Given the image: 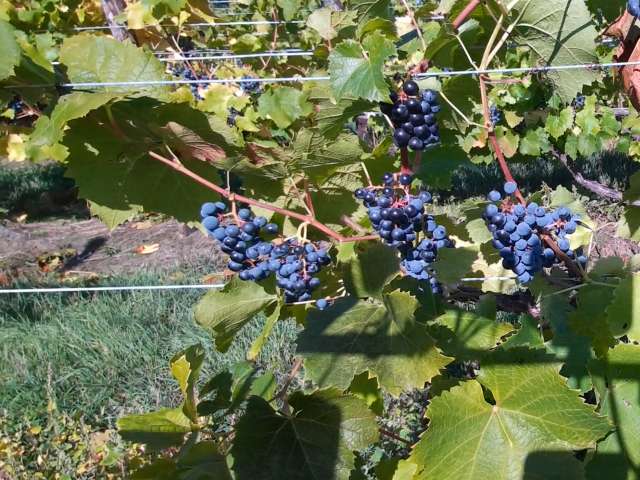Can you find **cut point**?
Masks as SVG:
<instances>
[{
    "label": "cut point",
    "instance_id": "6a23745f",
    "mask_svg": "<svg viewBox=\"0 0 640 480\" xmlns=\"http://www.w3.org/2000/svg\"><path fill=\"white\" fill-rule=\"evenodd\" d=\"M310 224H311V223H309V222H307V221H301V222L298 224V226H297V229H296V235H297V236H300V235H301V231H302V229H303L302 236H303V237H306V236H307V234H308V225H310Z\"/></svg>",
    "mask_w": 640,
    "mask_h": 480
}]
</instances>
